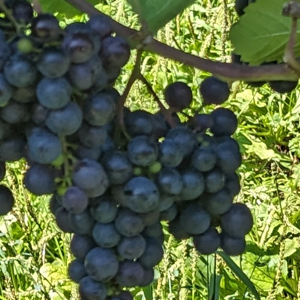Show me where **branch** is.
Masks as SVG:
<instances>
[{"label":"branch","instance_id":"1","mask_svg":"<svg viewBox=\"0 0 300 300\" xmlns=\"http://www.w3.org/2000/svg\"><path fill=\"white\" fill-rule=\"evenodd\" d=\"M79 11H83L90 16L102 14L112 23V31L126 41L131 47L136 49H145L153 55L167 57L172 61H179L184 64L192 65L198 69L218 76L235 77L237 80H259V81H295L300 78V62L294 57L295 40L297 35L298 18L300 17V4L294 1H288L284 4L283 13L286 17H291L288 44L285 47L283 61L281 65H238V64H221L209 62L207 59L196 57L193 53L184 50H177L172 46L163 44L150 36L145 35L139 30L123 26L107 14L99 11L96 7L86 0H65Z\"/></svg>","mask_w":300,"mask_h":300}]
</instances>
